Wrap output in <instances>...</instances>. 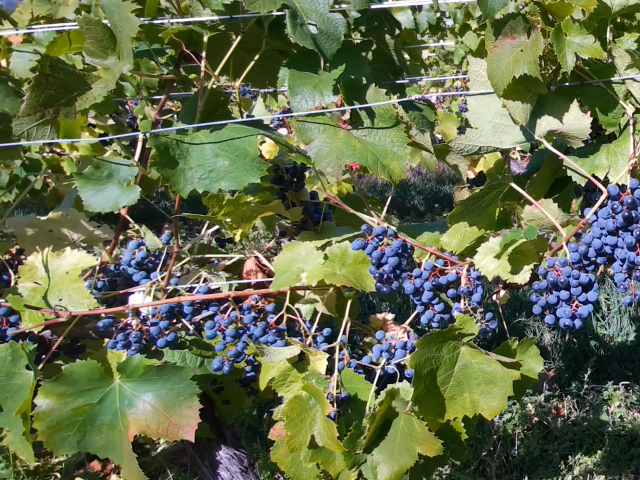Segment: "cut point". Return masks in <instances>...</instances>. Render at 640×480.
<instances>
[{
	"label": "cut point",
	"mask_w": 640,
	"mask_h": 480,
	"mask_svg": "<svg viewBox=\"0 0 640 480\" xmlns=\"http://www.w3.org/2000/svg\"><path fill=\"white\" fill-rule=\"evenodd\" d=\"M333 290H334V287H333V286H330V287H328V288L326 289V291L323 293V295H322V297H321V300H320V303H319V306H318V308H317V317H318V318H321V317H322V311H323V308H324V306H325L326 299L328 298V296L330 295V293H331Z\"/></svg>",
	"instance_id": "cut-point-1"
},
{
	"label": "cut point",
	"mask_w": 640,
	"mask_h": 480,
	"mask_svg": "<svg viewBox=\"0 0 640 480\" xmlns=\"http://www.w3.org/2000/svg\"><path fill=\"white\" fill-rule=\"evenodd\" d=\"M163 286L162 282H157L155 284L152 285L151 290H150V297H149V301L153 302L155 300V293H156V289L160 288Z\"/></svg>",
	"instance_id": "cut-point-2"
}]
</instances>
